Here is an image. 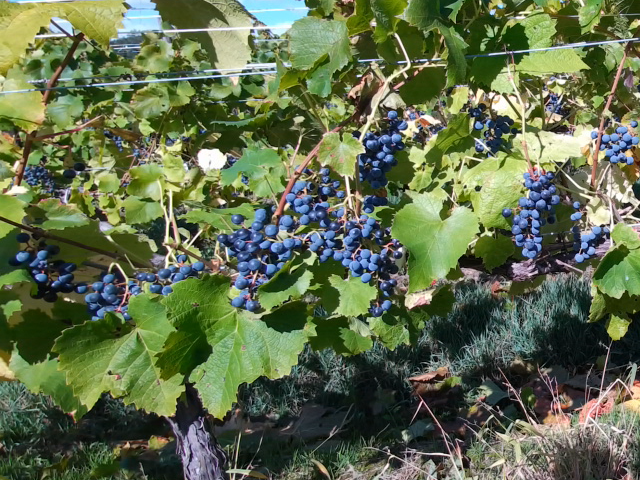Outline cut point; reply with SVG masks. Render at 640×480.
<instances>
[{
    "label": "cut point",
    "mask_w": 640,
    "mask_h": 480,
    "mask_svg": "<svg viewBox=\"0 0 640 480\" xmlns=\"http://www.w3.org/2000/svg\"><path fill=\"white\" fill-rule=\"evenodd\" d=\"M526 146L528 147V149L530 150V152L532 153V155L536 158V163H537V165H540L539 155L534 151V149L532 148L531 144H529V143L526 141Z\"/></svg>",
    "instance_id": "6a23745f"
}]
</instances>
